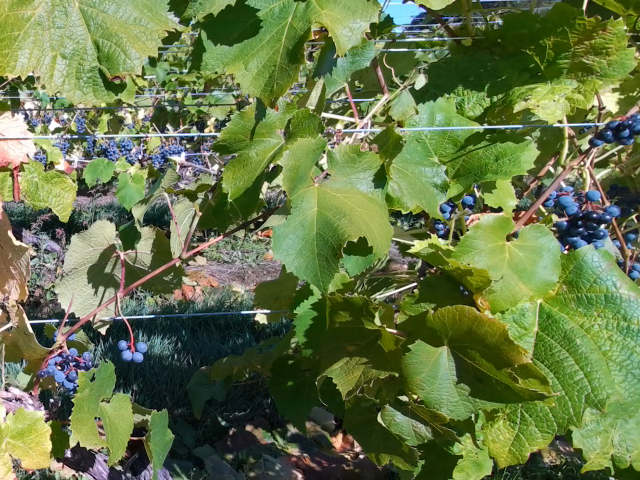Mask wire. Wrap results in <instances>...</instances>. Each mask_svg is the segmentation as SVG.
Wrapping results in <instances>:
<instances>
[{
  "instance_id": "1",
  "label": "wire",
  "mask_w": 640,
  "mask_h": 480,
  "mask_svg": "<svg viewBox=\"0 0 640 480\" xmlns=\"http://www.w3.org/2000/svg\"><path fill=\"white\" fill-rule=\"evenodd\" d=\"M219 131L213 132H150V133H80V134H38V135H4L0 136V141L6 140H65L83 138H152V137H215L219 136Z\"/></svg>"
},
{
  "instance_id": "2",
  "label": "wire",
  "mask_w": 640,
  "mask_h": 480,
  "mask_svg": "<svg viewBox=\"0 0 640 480\" xmlns=\"http://www.w3.org/2000/svg\"><path fill=\"white\" fill-rule=\"evenodd\" d=\"M603 121H589V122H558L550 124H519V125H466V126H430V127H412L402 128L396 127L395 131L399 133H414V132H433V131H468V130H521V129H552V128H576V127H591V126H603Z\"/></svg>"
},
{
  "instance_id": "3",
  "label": "wire",
  "mask_w": 640,
  "mask_h": 480,
  "mask_svg": "<svg viewBox=\"0 0 640 480\" xmlns=\"http://www.w3.org/2000/svg\"><path fill=\"white\" fill-rule=\"evenodd\" d=\"M293 309H251V310H231V311H207V312H179L170 314H148V315H125L126 320H151V319H172L181 317H209V316H233V315H253V314H293Z\"/></svg>"
}]
</instances>
